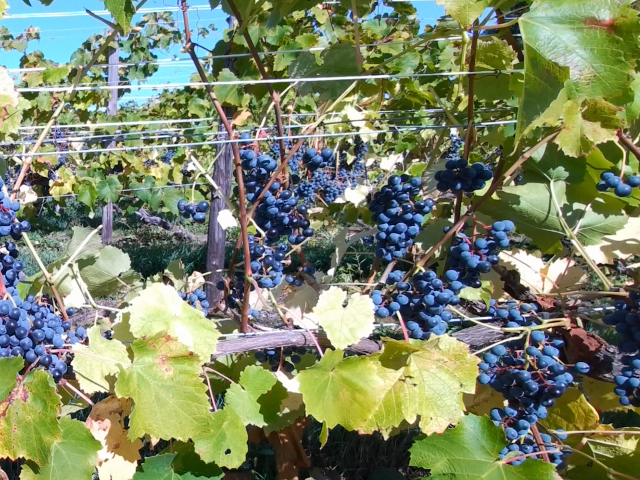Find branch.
<instances>
[{
  "instance_id": "1",
  "label": "branch",
  "mask_w": 640,
  "mask_h": 480,
  "mask_svg": "<svg viewBox=\"0 0 640 480\" xmlns=\"http://www.w3.org/2000/svg\"><path fill=\"white\" fill-rule=\"evenodd\" d=\"M304 142H305V139L297 140L296 144L287 152V154L285 156L284 140L279 141L281 162L273 170V172L271 173V176H270L269 180L267 181L266 185L262 188V190L258 194V197L255 199V201L253 202L251 208L249 209V211L247 213L245 211V195H244V184H243V174H242V167H241V155H240V152H239V144H233V147H234V155H235V158H236V170H237V176H238V187H239V197H240V211L237 210L235 207L231 206L227 202V200L224 198L223 194L220 192V190L217 187V185L213 182L212 179H210L209 174L205 170H203L201 168V166L199 164V160L196 159L193 154L189 155L190 161H191L196 173L199 174L200 176H202V178L212 187V190L215 192V194L217 195L219 200L222 202V204L225 206V208L227 210L231 211L233 214L237 215L238 217L242 216V218H241L242 224H241L240 232H239L238 238L236 239V242L234 244L233 252H232V255H231L230 259H229V263H228V266H227V273H226L225 285H224V290H223V302H222V305L223 306H227L228 305V293H229L230 282H231L232 268H233L234 262L236 260L237 254H238L239 247H240L241 242H242L243 237H244V242H245V273L246 274H245V280H244L243 315H242V332L243 333L247 332L248 307L250 305V287H251V283H252V273H251V270H250V240H249V232H248V222L250 221L252 215L254 214L255 210L258 207V205L262 201L264 195L269 190V188L272 186L276 176L278 175V173L280 171L282 172L283 189L284 190L288 189L286 163L291 158L292 154L295 151H297L301 147V144L304 143Z\"/></svg>"
},
{
  "instance_id": "2",
  "label": "branch",
  "mask_w": 640,
  "mask_h": 480,
  "mask_svg": "<svg viewBox=\"0 0 640 480\" xmlns=\"http://www.w3.org/2000/svg\"><path fill=\"white\" fill-rule=\"evenodd\" d=\"M560 134L559 130H555L552 133L546 135L542 140L537 142L534 146H532L526 153H523L512 165L505 170L491 185V187L481 196L477 203L472 206L467 213H465L460 220V211H461V202H462V190H458L456 194V204H455V225L445 233L435 244L430 248L428 253L413 267V269L402 279L403 283H407L414 274L420 271V267H422L434 254L436 249L443 244L448 238H450L462 225L466 222V220L473 215L475 211L483 204V202L492 194V192L498 187V185L503 181V179L508 176L516 167L523 164V161L531 156L536 150H538L541 146L546 144L550 139L558 136Z\"/></svg>"
},
{
  "instance_id": "3",
  "label": "branch",
  "mask_w": 640,
  "mask_h": 480,
  "mask_svg": "<svg viewBox=\"0 0 640 480\" xmlns=\"http://www.w3.org/2000/svg\"><path fill=\"white\" fill-rule=\"evenodd\" d=\"M473 22H474V25H462V26H457V27H453V28L443 29V30H441L439 32L420 37L419 39L415 40L413 43H411L409 46L404 48L399 53H396V54H394L392 56H389L386 59L374 64L372 67H370L366 71V74L370 75L371 73H373L374 71H376L380 67H382V66H384V65H386V64H388V63H390V62H392L394 60H397V59L401 58L402 56L407 54L409 51H411L413 48L417 47L419 44H422V43H424V42H426L428 40H432V39L444 36L445 34L455 33V32L464 31V30H473L471 55H470V58H469V69H474V60H475V57H476V50H477L478 30H483V29H502V28H505V27H508V26H512V25H515V24L519 23L520 19L519 18H515L513 20L506 21V22L499 23V24H481V25H479V20L477 18H474Z\"/></svg>"
},
{
  "instance_id": "4",
  "label": "branch",
  "mask_w": 640,
  "mask_h": 480,
  "mask_svg": "<svg viewBox=\"0 0 640 480\" xmlns=\"http://www.w3.org/2000/svg\"><path fill=\"white\" fill-rule=\"evenodd\" d=\"M21 236L25 242V244L28 246V248L32 251L33 255H34V259L36 260V263L38 264L39 268L41 269L43 275L46 278L47 284L49 286V289L53 295V297L56 299L57 305L60 308V310L63 313V319L67 320L68 319V311L66 309V307L64 306L60 295L57 293V290L54 287V283L52 281V278L48 272V270L46 269V267L44 266L39 253L37 251V249L35 248V246L33 245V243L30 241L28 235L25 232L21 233Z\"/></svg>"
},
{
  "instance_id": "5",
  "label": "branch",
  "mask_w": 640,
  "mask_h": 480,
  "mask_svg": "<svg viewBox=\"0 0 640 480\" xmlns=\"http://www.w3.org/2000/svg\"><path fill=\"white\" fill-rule=\"evenodd\" d=\"M449 309L452 310L453 312H455L456 314L465 317L471 323H475L477 325L486 326L487 328H490V329H493V330H497V331H503V332L512 331L513 333H516V332L523 333V332L532 331V330H535V329L536 330H543V329L558 328V327L569 325V322H555V323L537 324V325L532 326V327L500 328V327L491 326V325L486 324V323H481V322H479L477 320H472V318L469 315H467L465 313H462L461 311L457 310L453 306H449Z\"/></svg>"
},
{
  "instance_id": "6",
  "label": "branch",
  "mask_w": 640,
  "mask_h": 480,
  "mask_svg": "<svg viewBox=\"0 0 640 480\" xmlns=\"http://www.w3.org/2000/svg\"><path fill=\"white\" fill-rule=\"evenodd\" d=\"M182 11H183V20H184V31H185V39H186V43L188 46V50H189V54L191 57V60L193 61L198 74L200 75V78L203 80V82H207L208 78L205 75L200 62L198 61V58L195 55L194 52V47L192 44V40H191V36H190V29H189V18H188V8H187V1L183 0L182 1Z\"/></svg>"
},
{
  "instance_id": "7",
  "label": "branch",
  "mask_w": 640,
  "mask_h": 480,
  "mask_svg": "<svg viewBox=\"0 0 640 480\" xmlns=\"http://www.w3.org/2000/svg\"><path fill=\"white\" fill-rule=\"evenodd\" d=\"M360 84L359 80L356 81H352L351 82V86H349L348 88H346L344 91H342L338 97V99H336L335 101H333L324 111L321 112V114L318 116V118L309 126V128L305 131V134H309L312 133L313 130L321 123V121L323 120V118L329 114L338 104H340L344 98L350 93L352 92L354 89L357 88V86Z\"/></svg>"
},
{
  "instance_id": "8",
  "label": "branch",
  "mask_w": 640,
  "mask_h": 480,
  "mask_svg": "<svg viewBox=\"0 0 640 480\" xmlns=\"http://www.w3.org/2000/svg\"><path fill=\"white\" fill-rule=\"evenodd\" d=\"M121 30L120 26H116L114 28V30L111 32V34L109 35V37L106 39V41L103 42L101 48L99 49V51L93 55L88 62L84 65L82 71L80 72V74L77 76L76 80L74 81V83L72 84V87H77L79 85V83L81 82L82 78L86 75L87 71L89 70V67L93 65V63L100 58V56L104 53V51L106 50L107 46H109L111 44V42L113 41L114 37L116 36V34Z\"/></svg>"
},
{
  "instance_id": "9",
  "label": "branch",
  "mask_w": 640,
  "mask_h": 480,
  "mask_svg": "<svg viewBox=\"0 0 640 480\" xmlns=\"http://www.w3.org/2000/svg\"><path fill=\"white\" fill-rule=\"evenodd\" d=\"M71 95H72V92H70V93H66V94L64 95V98L62 99V101H61L60 105L58 106V108L56 109V111H54V112L51 114L50 118L48 119V122H47V124L45 125L43 132H42V133L39 135V137L35 140V142H34V144H33L32 148H31V151H32V152H36V151H37V149H38V147H39V144H40V143L43 141V139L47 136V134H48V132H49V130H50V128H51V126H52V124H53L54 120L56 119V117H57V116H59V115L61 114L62 110L64 109V107H65V105L67 104V102H68V100H69V98H70V96H71Z\"/></svg>"
},
{
  "instance_id": "10",
  "label": "branch",
  "mask_w": 640,
  "mask_h": 480,
  "mask_svg": "<svg viewBox=\"0 0 640 480\" xmlns=\"http://www.w3.org/2000/svg\"><path fill=\"white\" fill-rule=\"evenodd\" d=\"M207 90H208V93L210 94V97L213 99L216 111H217V113H218L223 125L225 126V129L229 133L230 138L235 139L236 135L234 133V130L231 128L230 124L228 123V120L226 119V117H225V115H224V113L222 111V108H221L220 103H219V99H218L217 95L215 94V92L213 90V87L212 86L207 87Z\"/></svg>"
},
{
  "instance_id": "11",
  "label": "branch",
  "mask_w": 640,
  "mask_h": 480,
  "mask_svg": "<svg viewBox=\"0 0 640 480\" xmlns=\"http://www.w3.org/2000/svg\"><path fill=\"white\" fill-rule=\"evenodd\" d=\"M243 33H244L245 41L247 42L249 50H250V52H251V54H252V56L254 58V61L256 62L257 66L259 68V71H260L262 77L266 78L267 77V72H266V70L264 68V65H263L261 59L259 58V56H258V54H257V52L255 50V47H254V44L252 43V40L250 39L249 30L248 29H244Z\"/></svg>"
},
{
  "instance_id": "12",
  "label": "branch",
  "mask_w": 640,
  "mask_h": 480,
  "mask_svg": "<svg viewBox=\"0 0 640 480\" xmlns=\"http://www.w3.org/2000/svg\"><path fill=\"white\" fill-rule=\"evenodd\" d=\"M267 87L270 89V91L273 94L275 111H276V118H277V124H278V136L284 135V132H283V121H282V116H281V109H280L278 91L275 89V86L272 83H268Z\"/></svg>"
},
{
  "instance_id": "13",
  "label": "branch",
  "mask_w": 640,
  "mask_h": 480,
  "mask_svg": "<svg viewBox=\"0 0 640 480\" xmlns=\"http://www.w3.org/2000/svg\"><path fill=\"white\" fill-rule=\"evenodd\" d=\"M473 84H474V75L470 74L469 75V81H468V97H467L468 121H469L470 125L474 124L473 103H472V99H473Z\"/></svg>"
},
{
  "instance_id": "14",
  "label": "branch",
  "mask_w": 640,
  "mask_h": 480,
  "mask_svg": "<svg viewBox=\"0 0 640 480\" xmlns=\"http://www.w3.org/2000/svg\"><path fill=\"white\" fill-rule=\"evenodd\" d=\"M31 164H32V157L31 158H27V161H26L25 165L23 166V168L21 170L19 178L16 181V183L14 184V188H13L11 194H10V199L11 200L15 199L16 194H17V192L19 190V187L22 184V182L24 181V177H25L28 169L30 168Z\"/></svg>"
},
{
  "instance_id": "15",
  "label": "branch",
  "mask_w": 640,
  "mask_h": 480,
  "mask_svg": "<svg viewBox=\"0 0 640 480\" xmlns=\"http://www.w3.org/2000/svg\"><path fill=\"white\" fill-rule=\"evenodd\" d=\"M618 141L621 142L624 147L630 150L634 154L637 160H640V149L637 146H635V144L632 141L628 140L625 134H619Z\"/></svg>"
},
{
  "instance_id": "16",
  "label": "branch",
  "mask_w": 640,
  "mask_h": 480,
  "mask_svg": "<svg viewBox=\"0 0 640 480\" xmlns=\"http://www.w3.org/2000/svg\"><path fill=\"white\" fill-rule=\"evenodd\" d=\"M228 4L231 6V9L233 10V12H234V14L236 16V20L238 22H241L242 21V17H241L240 11L238 10V8H237V6L235 4V1L234 0H229Z\"/></svg>"
},
{
  "instance_id": "17",
  "label": "branch",
  "mask_w": 640,
  "mask_h": 480,
  "mask_svg": "<svg viewBox=\"0 0 640 480\" xmlns=\"http://www.w3.org/2000/svg\"><path fill=\"white\" fill-rule=\"evenodd\" d=\"M295 251L297 252V255H298L299 259L302 261V263H303L304 265H307V264H308V260H307V258L303 255L301 248H300V247H296V248H295Z\"/></svg>"
}]
</instances>
